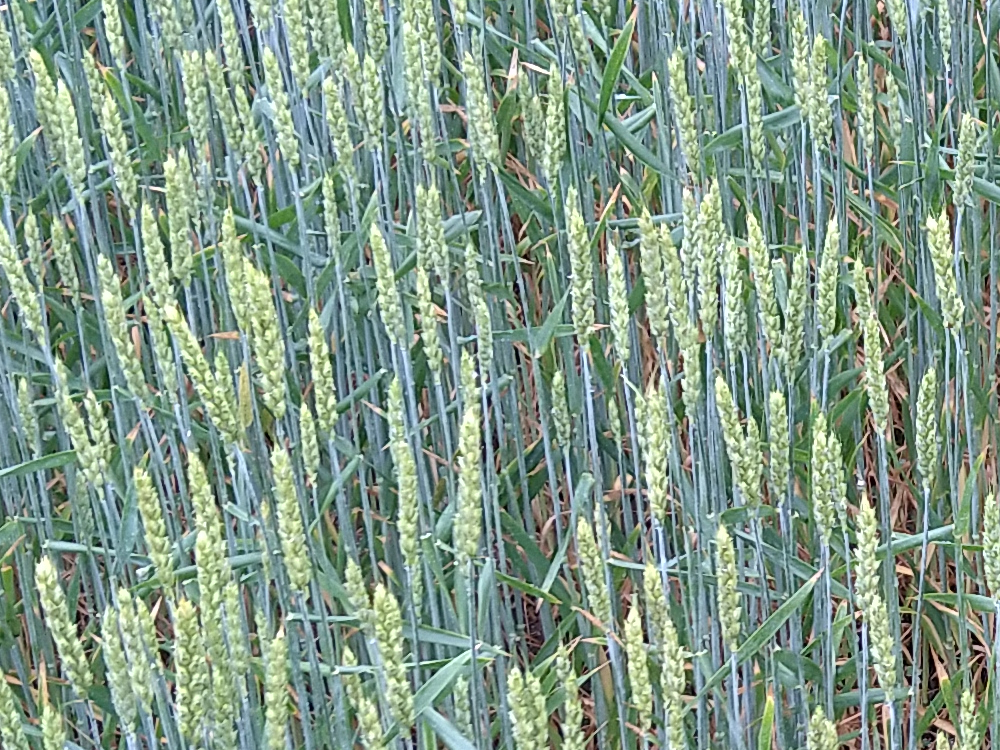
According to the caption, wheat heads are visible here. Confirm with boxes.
[717,0,745,68]
[82,51,106,121]
[117,591,153,711]
[224,580,250,682]
[552,370,569,445]
[163,305,236,440]
[83,390,112,477]
[324,79,355,171]
[358,699,395,750]
[527,673,549,750]
[643,565,669,650]
[401,24,420,124]
[341,655,396,750]
[210,669,243,750]
[830,435,847,526]
[176,150,200,220]
[724,243,745,356]
[455,354,484,556]
[624,609,653,727]
[545,124,568,182]
[142,297,180,407]
[17,379,39,450]
[360,0,387,59]
[234,88,265,172]
[716,527,742,647]
[507,669,535,750]
[97,0,126,62]
[474,299,494,387]
[96,258,150,406]
[662,626,688,750]
[271,447,312,590]
[265,629,290,750]
[42,706,70,750]
[0,214,45,342]
[0,88,18,191]
[569,213,596,341]
[464,238,483,313]
[955,115,975,203]
[916,367,938,487]
[852,499,898,690]
[323,0,346,81]
[180,52,211,153]
[0,666,33,750]
[204,52,239,145]
[538,0,572,49]
[801,709,824,750]
[742,417,762,507]
[557,650,585,750]
[666,693,688,750]
[323,176,340,257]
[817,220,841,337]
[768,392,790,500]
[682,189,698,284]
[852,261,874,329]
[51,219,79,300]
[22,208,43,286]
[344,558,372,635]
[325,125,356,182]
[282,0,309,88]
[518,73,544,160]
[453,677,473,743]
[880,0,908,38]
[745,47,765,159]
[812,35,830,142]
[397,441,420,559]
[219,211,251,333]
[660,235,693,349]
[414,0,441,79]
[608,246,630,361]
[748,214,781,350]
[715,377,745,494]
[983,492,1000,599]
[307,0,327,52]
[959,689,979,750]
[164,160,193,280]
[101,610,136,729]
[34,559,92,696]
[418,270,442,372]
[753,0,771,52]
[786,250,808,371]
[194,531,225,661]
[0,0,18,82]
[54,367,101,486]
[133,468,175,594]
[28,51,63,162]
[428,188,448,282]
[59,82,87,191]
[186,452,226,557]
[696,186,721,338]
[415,186,428,272]
[638,211,668,335]
[575,519,612,633]
[364,58,383,149]
[925,215,962,327]
[939,0,952,60]
[791,13,809,107]
[865,316,889,431]
[172,602,208,742]
[417,83,435,154]
[662,620,684,704]
[888,75,902,154]
[215,0,244,85]
[307,308,336,433]
[462,56,500,162]
[140,204,172,305]
[102,97,136,207]
[132,0,182,46]
[822,722,840,750]
[812,412,831,535]
[373,589,414,726]
[668,52,702,177]
[341,650,362,714]
[247,266,287,415]
[299,404,320,482]
[546,65,566,173]
[263,49,299,163]
[567,10,591,60]
[369,225,405,340]
[858,56,875,157]
[647,388,670,522]
[215,350,238,423]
